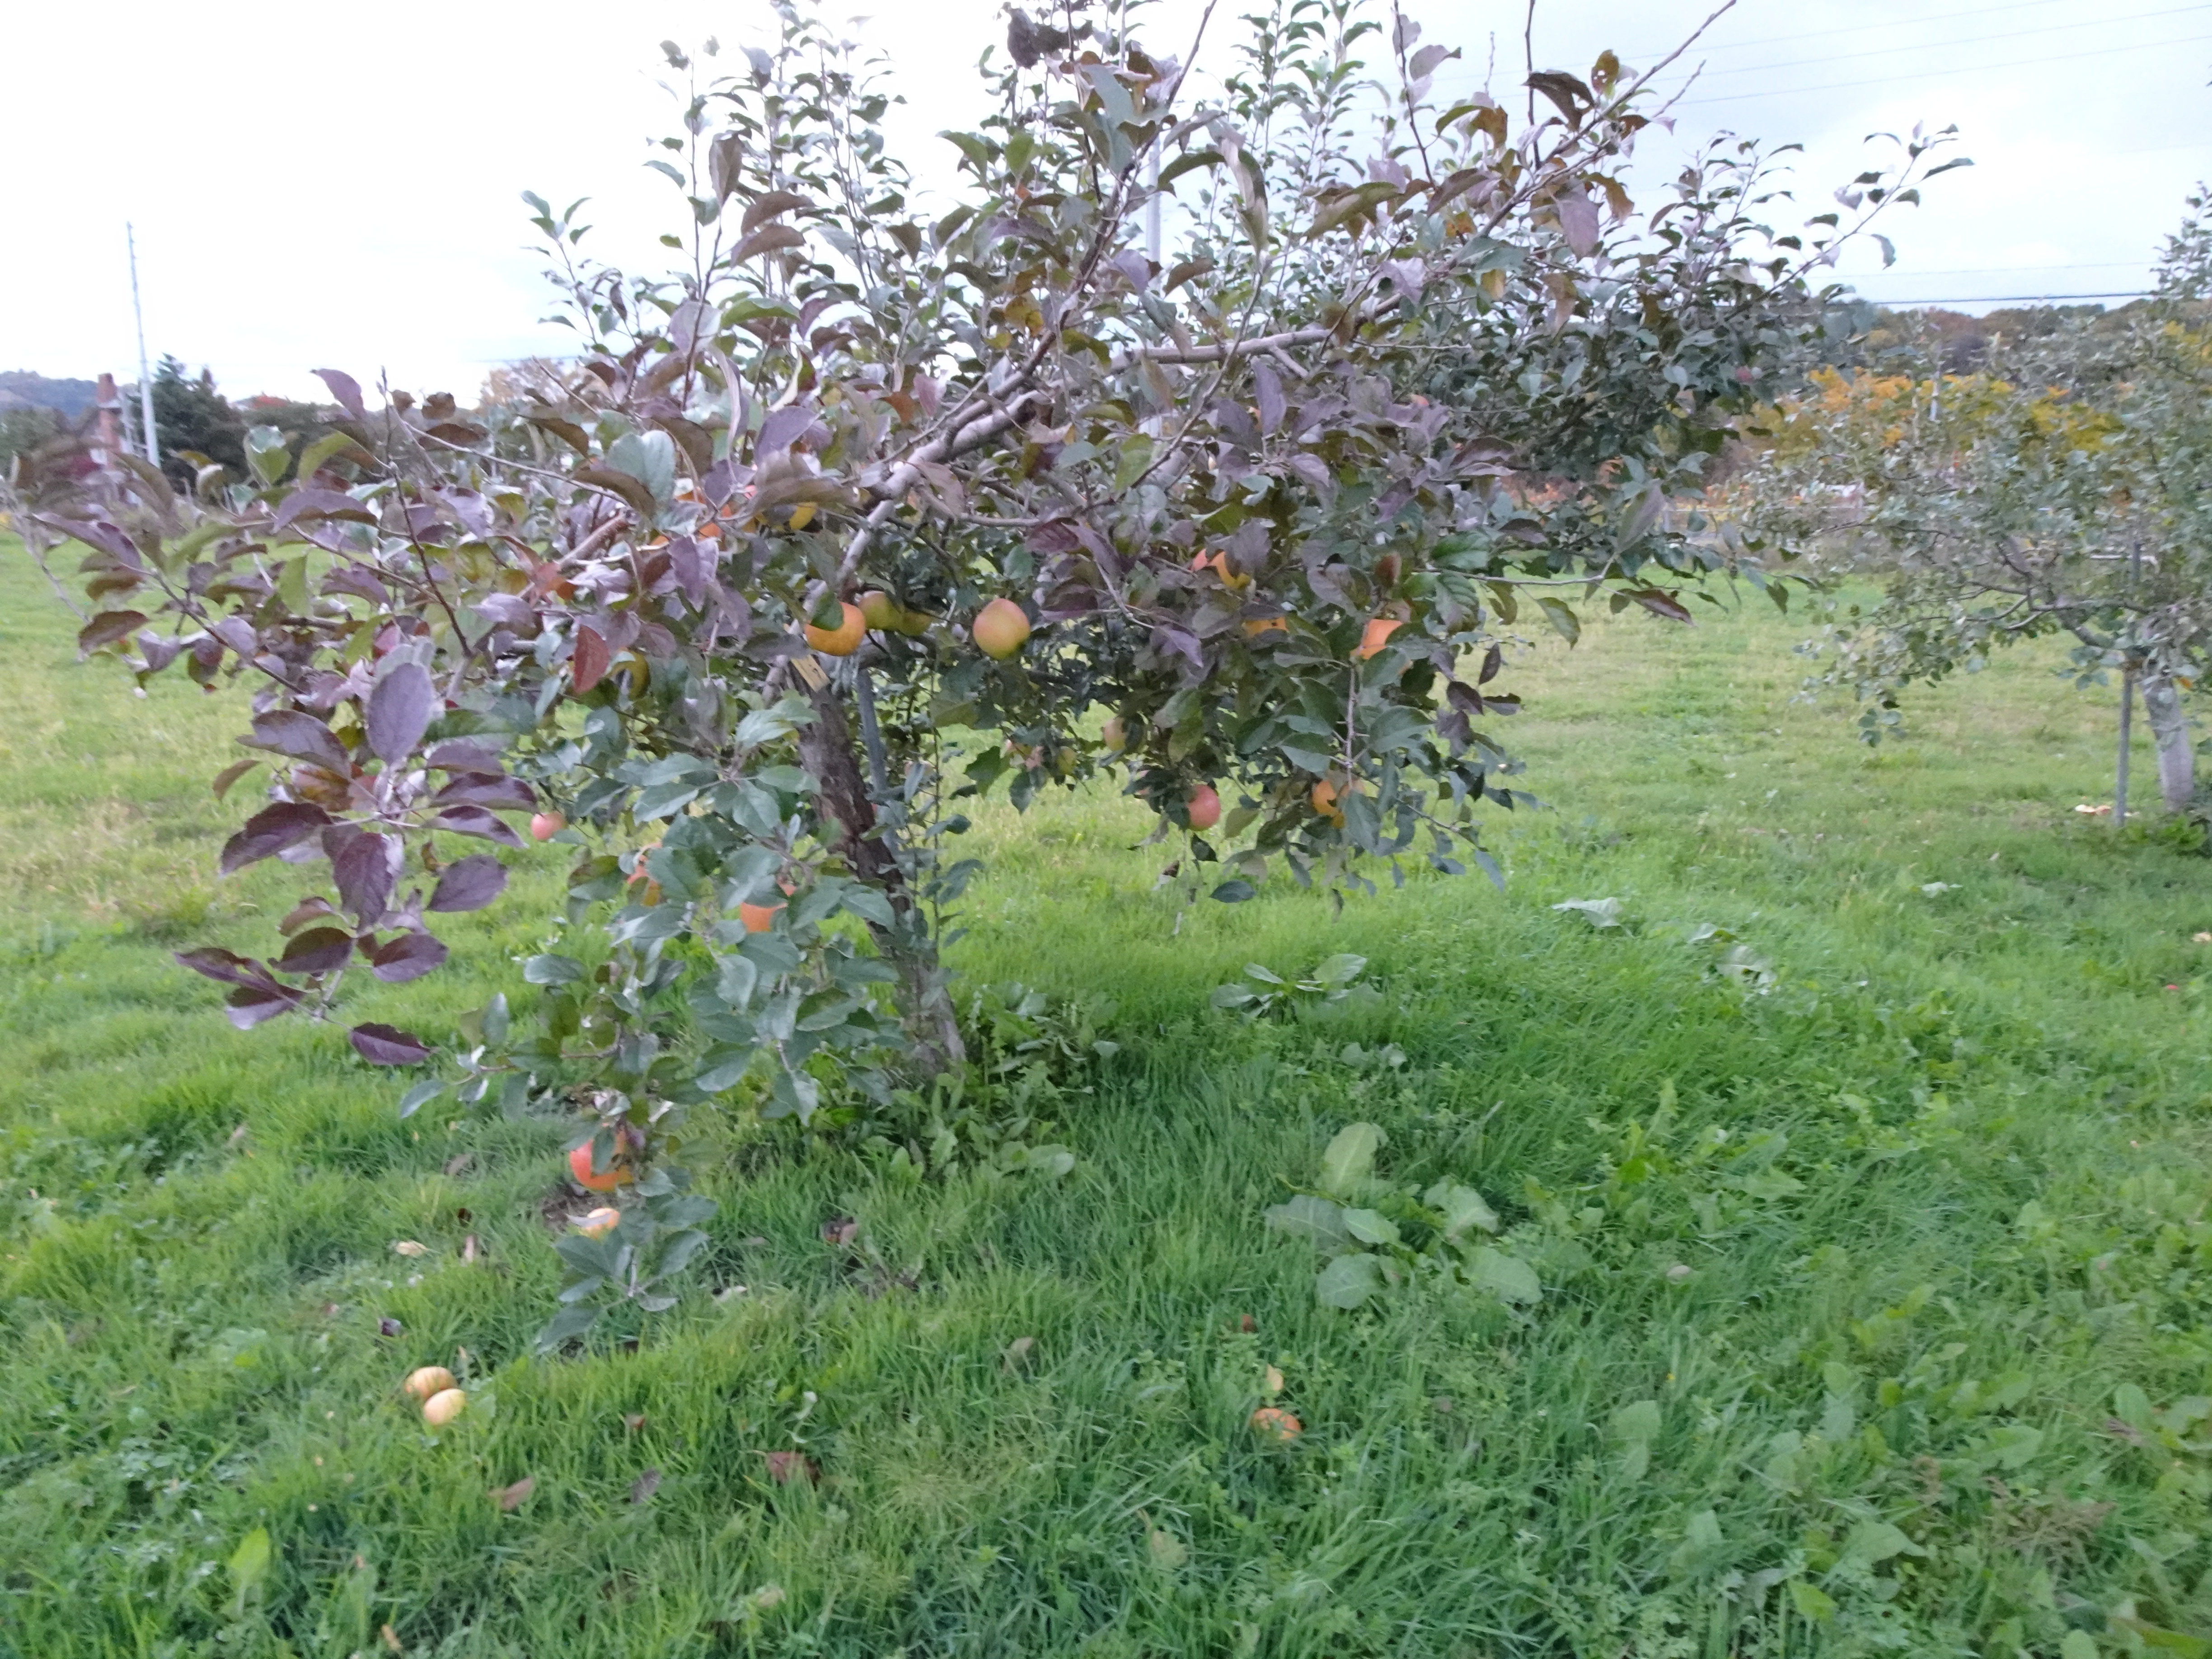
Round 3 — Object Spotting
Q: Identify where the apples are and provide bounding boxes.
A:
[1308,769,1369,828]
[2162,982,2184,1004]
[624,868,672,917]
[1351,615,1411,664]
[751,471,821,534]
[591,652,649,705]
[973,595,1033,665]
[803,594,867,660]
[1103,710,1148,753]
[1005,732,1037,765]
[894,598,932,638]
[2190,927,2211,953]
[859,590,906,634]
[737,882,804,938]
[1050,553,1099,599]
[715,481,759,526]
[633,842,680,879]
[1240,605,1289,647]
[1056,745,1085,774]
[650,528,716,576]
[1190,542,1257,598]
[568,1119,647,1189]
[1166,782,1223,831]
[1241,410,1270,437]
[528,806,570,843]
[678,495,724,553]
